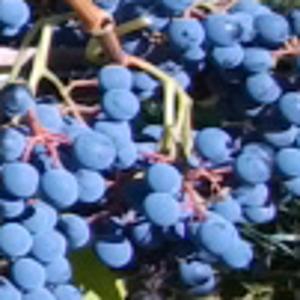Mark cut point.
<instances>
[{"mask_svg":"<svg viewBox=\"0 0 300 300\" xmlns=\"http://www.w3.org/2000/svg\"><path fill=\"white\" fill-rule=\"evenodd\" d=\"M81 16L79 11H72L71 13L58 14L42 20H38L34 23V26L30 29L24 39L20 42L16 54L13 58L12 72L9 76L11 81H15L19 74V65L26 50V46L31 42L32 38L37 32H41L38 39V45L36 48V57L34 58V64L32 69V76L29 85V96L34 98L37 95V84L41 82V75L52 81L66 100V106L74 116L79 114V110L73 103L72 95L66 88L65 84L53 73L49 68L50 63V39L54 25L57 23L67 22L69 20H76Z\"/></svg>","mask_w":300,"mask_h":300,"instance_id":"cut-point-1","label":"cut point"},{"mask_svg":"<svg viewBox=\"0 0 300 300\" xmlns=\"http://www.w3.org/2000/svg\"><path fill=\"white\" fill-rule=\"evenodd\" d=\"M124 61L131 67L138 68L145 73L154 75L162 80L164 94L163 123L173 125L175 121V92L178 99L176 124L183 129H190L193 125V104L190 95L176 83L164 70L144 61L141 58L126 56Z\"/></svg>","mask_w":300,"mask_h":300,"instance_id":"cut-point-2","label":"cut point"}]
</instances>
